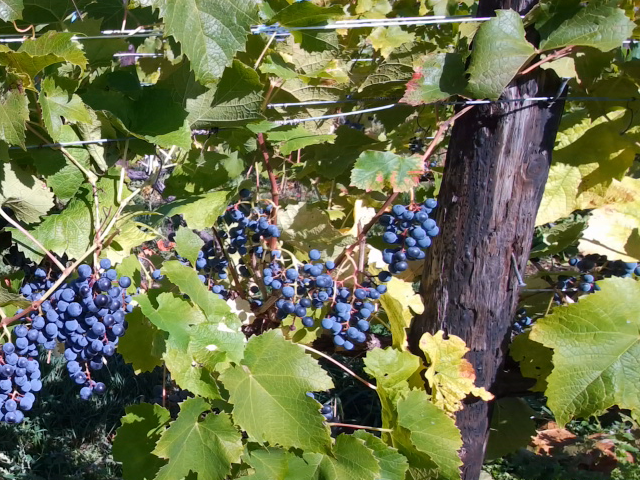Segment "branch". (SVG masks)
<instances>
[{
	"mask_svg": "<svg viewBox=\"0 0 640 480\" xmlns=\"http://www.w3.org/2000/svg\"><path fill=\"white\" fill-rule=\"evenodd\" d=\"M399 196L398 192H394L386 201V203L383 205L382 208H380L377 213H375L370 219L369 221L365 224V226L362 228L361 232L358 234V236L353 240V242L346 248L344 249L341 254L338 256V258L336 259V263L340 264L341 261L344 259L345 254L346 253H350V251H352L357 244L363 239V237L365 236L367 230L370 228V226L383 214L387 211V209L389 208V206L392 204V202Z\"/></svg>",
	"mask_w": 640,
	"mask_h": 480,
	"instance_id": "3",
	"label": "branch"
},
{
	"mask_svg": "<svg viewBox=\"0 0 640 480\" xmlns=\"http://www.w3.org/2000/svg\"><path fill=\"white\" fill-rule=\"evenodd\" d=\"M474 108V105H468L467 107H465L464 109H462L461 111L457 112L454 116L450 117L448 120H446L437 130V133L435 135L432 136L431 140L429 141V143L427 144L426 148H425V154L421 157L422 161H426L428 159V157L430 156V150L432 148V146L435 144L436 140L442 135V132L452 123L455 122L456 120H458L460 117H462L464 114L468 113L469 111H471Z\"/></svg>",
	"mask_w": 640,
	"mask_h": 480,
	"instance_id": "4",
	"label": "branch"
},
{
	"mask_svg": "<svg viewBox=\"0 0 640 480\" xmlns=\"http://www.w3.org/2000/svg\"><path fill=\"white\" fill-rule=\"evenodd\" d=\"M573 48L572 44H569L565 47L560 48L558 51H554L553 53H550L549 55H547L546 57L540 58L539 61L531 64L529 67H526L525 69L520 70L518 73L515 74V78L519 79L520 77H522L523 75L531 72L532 70L538 68L539 66H541L543 63L548 62L549 60H551L552 58H555L557 56H560L561 54H563L564 52H567L569 50H571Z\"/></svg>",
	"mask_w": 640,
	"mask_h": 480,
	"instance_id": "5",
	"label": "branch"
},
{
	"mask_svg": "<svg viewBox=\"0 0 640 480\" xmlns=\"http://www.w3.org/2000/svg\"><path fill=\"white\" fill-rule=\"evenodd\" d=\"M265 140V137L263 136L262 132L258 133L257 136V144L260 150H262L263 153V157L266 161L267 164V169L269 172V177H270V181L273 185V191H272V200H273V210H272V223L276 224L277 223V212H278V198H277V193H278V183L275 179V175H274V168L272 165V161H271V154L267 148V145L265 142H262Z\"/></svg>",
	"mask_w": 640,
	"mask_h": 480,
	"instance_id": "2",
	"label": "branch"
},
{
	"mask_svg": "<svg viewBox=\"0 0 640 480\" xmlns=\"http://www.w3.org/2000/svg\"><path fill=\"white\" fill-rule=\"evenodd\" d=\"M143 191V187L139 186L137 189H135L132 193L129 194L128 197H126L122 203V205L120 206L119 210L117 211L116 215L112 218V220L108 223V225L105 227V229L101 232V234L99 235V238L94 242V244L92 245V247H90L81 257H79L78 259H76L72 264L69 265L68 268L65 267L64 262L59 259L41 240H38L34 234L32 232H30L26 227H24L21 222L19 220H17L15 217H13L12 215H10L8 212H6L4 209H0V215L4 216L5 218H7L10 222H12L13 224H15L20 231H22L24 234H26L30 240L38 245L39 247H41V249L51 258L53 259V261L55 263H57L59 265L60 270L63 272L58 281L56 283H54L48 290L47 292L39 299H37L34 303L29 304L25 309L21 310L19 313H17L16 315L6 318L2 321H5L6 324L17 321L18 319H20L21 317H23L24 315H26L27 313H29L32 309H35L38 305L44 303L54 292L55 289H57L58 287H60L64 281V279L69 275V273L72 272V270L77 267L80 263H82L86 258H88L91 254H92V248L93 247H98L104 240V238L106 237V235L108 234V232L112 229V227L114 226V224L119 220V218L121 217L122 213L124 212L125 208L128 206V203L134 198L136 197L139 193H141Z\"/></svg>",
	"mask_w": 640,
	"mask_h": 480,
	"instance_id": "1",
	"label": "branch"
},
{
	"mask_svg": "<svg viewBox=\"0 0 640 480\" xmlns=\"http://www.w3.org/2000/svg\"><path fill=\"white\" fill-rule=\"evenodd\" d=\"M278 298H279L278 294L272 295L265 304H263L256 310L257 315L261 316L262 314H264L275 303V301Z\"/></svg>",
	"mask_w": 640,
	"mask_h": 480,
	"instance_id": "6",
	"label": "branch"
}]
</instances>
